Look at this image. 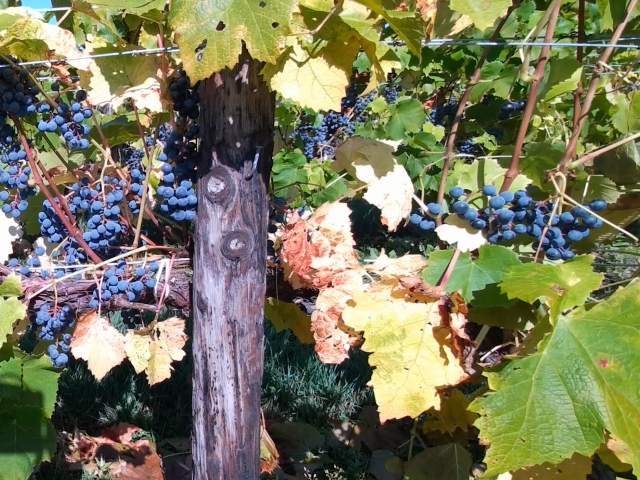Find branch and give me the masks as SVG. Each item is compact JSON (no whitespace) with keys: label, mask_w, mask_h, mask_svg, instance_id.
Masks as SVG:
<instances>
[{"label":"branch","mask_w":640,"mask_h":480,"mask_svg":"<svg viewBox=\"0 0 640 480\" xmlns=\"http://www.w3.org/2000/svg\"><path fill=\"white\" fill-rule=\"evenodd\" d=\"M29 79L31 80V82L35 85V87L44 95L45 99L48 101V103L53 107V108H58L59 104L54 102V100L51 98V96L49 95V93L47 92V90L40 84V82L36 79V77L34 76L33 73H29L28 74Z\"/></svg>","instance_id":"branch-10"},{"label":"branch","mask_w":640,"mask_h":480,"mask_svg":"<svg viewBox=\"0 0 640 480\" xmlns=\"http://www.w3.org/2000/svg\"><path fill=\"white\" fill-rule=\"evenodd\" d=\"M614 52H615L614 48H607L603 53L601 59L599 60L595 68V73L593 74V77L591 79V82L588 88V93L583 102L582 109H581L580 95L583 92L584 83L582 81H578L576 83V89L573 93L574 107H573L572 128L574 129V131L572 133L571 141L568 145V148L566 149V151L564 152L563 156L560 159L561 168L556 170L552 174V178L556 181V188L558 190H561L563 188V176H566L569 173V170L567 169L569 167L568 159L571 158L572 160H575L577 158L578 147H579V143H578L579 136L581 134L582 127L584 126V122L588 117L590 105L595 96V91L598 85V81L605 69L606 63L611 58Z\"/></svg>","instance_id":"branch-2"},{"label":"branch","mask_w":640,"mask_h":480,"mask_svg":"<svg viewBox=\"0 0 640 480\" xmlns=\"http://www.w3.org/2000/svg\"><path fill=\"white\" fill-rule=\"evenodd\" d=\"M490 52H491V48L489 46H486L483 49L482 54L476 63V70L473 72L469 80V85L465 90L459 103L457 104L454 121L452 122L449 130L448 144L445 151V160L443 162V166L441 169V183H440L439 191L437 194V202L439 204H442L444 202V197H445V193L448 185V171L453 159L452 153L456 143V137H457L456 132L462 120L464 106L469 101V98L473 93L475 87L478 86L481 82V71L483 70V65L486 62Z\"/></svg>","instance_id":"branch-3"},{"label":"branch","mask_w":640,"mask_h":480,"mask_svg":"<svg viewBox=\"0 0 640 480\" xmlns=\"http://www.w3.org/2000/svg\"><path fill=\"white\" fill-rule=\"evenodd\" d=\"M560 5H561V0H559L556 7L552 9L550 13V19L547 23V28L545 31V37L543 38V41H553L554 32L556 31L557 21L559 20L558 14H559Z\"/></svg>","instance_id":"branch-6"},{"label":"branch","mask_w":640,"mask_h":480,"mask_svg":"<svg viewBox=\"0 0 640 480\" xmlns=\"http://www.w3.org/2000/svg\"><path fill=\"white\" fill-rule=\"evenodd\" d=\"M639 3V0H631L627 6L625 7L624 13L620 19V21L618 22V25L614 31V34L610 40V43L612 42H618V40L620 39L621 33L623 32V29L627 23V21L630 18L631 12L633 10V8Z\"/></svg>","instance_id":"branch-5"},{"label":"branch","mask_w":640,"mask_h":480,"mask_svg":"<svg viewBox=\"0 0 640 480\" xmlns=\"http://www.w3.org/2000/svg\"><path fill=\"white\" fill-rule=\"evenodd\" d=\"M549 55H550V48L548 46H543L541 48V57L534 71L533 83L531 84L530 95L528 96V99H527L526 110L524 112V115L520 123V131L516 139L514 153L511 161V167L510 169H507L504 173L505 180L502 185V189L504 191H507L510 188L512 181H514L517 177L518 163L521 155L524 138L527 133L528 122L533 112V106H534V102L537 95V89L540 85V82L543 79L542 71L549 58Z\"/></svg>","instance_id":"branch-4"},{"label":"branch","mask_w":640,"mask_h":480,"mask_svg":"<svg viewBox=\"0 0 640 480\" xmlns=\"http://www.w3.org/2000/svg\"><path fill=\"white\" fill-rule=\"evenodd\" d=\"M41 137L43 138V140L45 141V143L47 144V146L50 148V150L56 155V157L58 158V160L64 165V167L66 168V170L72 175L75 176L76 172L73 170V168L69 165V163L66 161V159L61 155V153L58 151V149L55 147V145L50 141V138L47 136V134L45 132L41 133Z\"/></svg>","instance_id":"branch-9"},{"label":"branch","mask_w":640,"mask_h":480,"mask_svg":"<svg viewBox=\"0 0 640 480\" xmlns=\"http://www.w3.org/2000/svg\"><path fill=\"white\" fill-rule=\"evenodd\" d=\"M87 140L89 142H91L93 145H95L99 151L101 152V154L105 157V159L107 160V162L109 163V165L112 167V169L114 170V172L116 173V175L120 178V179H124L125 175L120 171V169L118 168V166L115 164L114 160L111 158L110 154L105 150L104 146L97 141L96 139H94L91 135L87 136Z\"/></svg>","instance_id":"branch-8"},{"label":"branch","mask_w":640,"mask_h":480,"mask_svg":"<svg viewBox=\"0 0 640 480\" xmlns=\"http://www.w3.org/2000/svg\"><path fill=\"white\" fill-rule=\"evenodd\" d=\"M9 118L12 120V122L14 124V129H15L16 135H17V137L19 139V142H20V144H21V146L23 148L25 159H26L28 165L30 166V170H31V172L33 174V179H34L37 187L41 191L42 195L46 199H48L49 203L56 210V212L60 216L64 226L68 229V231L76 239V241L84 248L86 253L89 255L91 261L93 263L97 264V265H94L92 268H87L85 270H81V271H78L76 273H71V274H68L66 276H63L62 278L56 279L53 282L49 283L48 285L42 287L38 291L34 292L30 296H27V299L34 298L35 296H37L41 292L49 289L51 286H54L55 284H57L58 282L63 281L64 279L71 278V277H74V276H78L80 274L88 273L89 271L95 270L97 268H99L100 270H106L107 268H109V266L106 265L108 261H116L117 259H121V258H123L125 256H128V255H131V254H132V260H137V252H139V251H143V250L144 251H149L151 249H171V245H155V243L152 240H150L148 238H145V236L141 233L142 221H143L144 213H146L148 215L150 221L157 227L158 231L161 234H163L169 240H173L174 239V236L171 235L167 230L164 229V227L160 224V222L154 217V215L150 211V209L145 205L146 198L148 196V188H149L150 176H151V174L153 172V160H154V156H155L156 143H157V140H158V136H159V133H160V130H161V125H162V120H163V114L162 113L158 114L156 128H155L152 140H151L150 153H149V157H148V166H147V171L145 173V180H144V185H143V194L141 195V198L139 196H137L136 194H134V193H130L129 194V197L131 199L135 200L136 203L138 204V206L140 207V211H139L138 218H137V227H135L128 219L123 217L122 213L118 214V219L122 223H124L131 231L134 232L133 249L131 251L125 252V253H123L121 255L115 256L112 259H108V260H105L103 262L97 255H94V252L90 249V247L87 245V243L84 240H82L83 234L79 230V226L76 224L73 214L69 211V209L67 207L66 199L63 197L62 192L58 189V187L56 185V182L50 176V174H49L47 168L45 167V165L38 159L37 156H34V157L32 156L31 149H30V146H29V144L27 142L25 134L23 132L20 119L17 117V115L15 113H11L9 115ZM37 166L41 169L43 175L45 176V179L49 182V184L51 185V188L53 189L54 193L57 195L58 199L60 200L61 205H62V209L57 204V202L53 199L52 194L48 191L47 187L44 185V182H43V180H42V178L40 176V172H39Z\"/></svg>","instance_id":"branch-1"},{"label":"branch","mask_w":640,"mask_h":480,"mask_svg":"<svg viewBox=\"0 0 640 480\" xmlns=\"http://www.w3.org/2000/svg\"><path fill=\"white\" fill-rule=\"evenodd\" d=\"M522 2V0H512V7H509L506 15L503 16L498 22L497 25L494 27V29L492 30L489 39L491 41H495L497 39V36L499 35V33L501 32V30L503 29L504 25L507 23V19L509 18V15H512L514 8H518L520 6V3Z\"/></svg>","instance_id":"branch-7"}]
</instances>
